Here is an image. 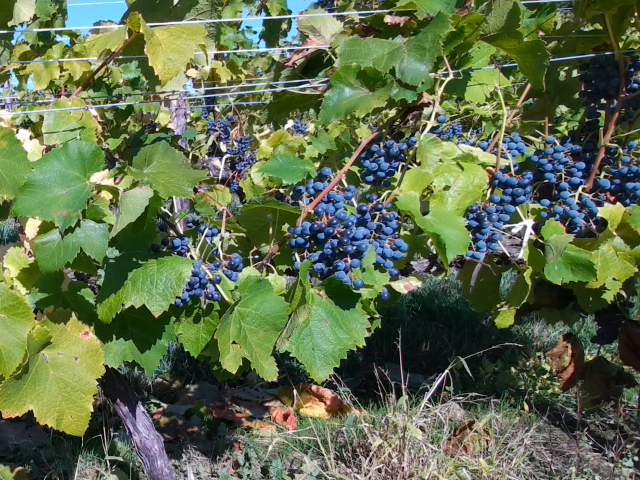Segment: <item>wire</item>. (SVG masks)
<instances>
[{"instance_id":"d2f4af69","label":"wire","mask_w":640,"mask_h":480,"mask_svg":"<svg viewBox=\"0 0 640 480\" xmlns=\"http://www.w3.org/2000/svg\"><path fill=\"white\" fill-rule=\"evenodd\" d=\"M329 86H330L329 82L304 83V84L283 85L279 87H270L267 89H260V90H244V91H230V92H223V93L198 94V95L188 96L185 98H171V97L141 98V99H131V100H120L116 103H101V104H92V105H67V106H59V107H52V108H35L28 111H7V112H0V117L30 116L38 113H54V112H62V111H69V110H94V109H103V108H118L122 105H133V104H143V103H187L190 101H195L200 99L225 98V97L246 96V95H262V94H269L272 92H281L285 90L324 88Z\"/></svg>"},{"instance_id":"a73af890","label":"wire","mask_w":640,"mask_h":480,"mask_svg":"<svg viewBox=\"0 0 640 480\" xmlns=\"http://www.w3.org/2000/svg\"><path fill=\"white\" fill-rule=\"evenodd\" d=\"M389 8L369 9V10H351L339 12H323V13H294V14H275V15H248L245 17H218L208 19H181V20H165V21H146V26H167V25H184V24H210L220 22H248L250 20H277V19H322L326 17H341L354 15H372L389 13Z\"/></svg>"},{"instance_id":"4f2155b8","label":"wire","mask_w":640,"mask_h":480,"mask_svg":"<svg viewBox=\"0 0 640 480\" xmlns=\"http://www.w3.org/2000/svg\"><path fill=\"white\" fill-rule=\"evenodd\" d=\"M330 48H331L330 44H295V45L285 46V47H263V48L235 47V48L195 51L194 55L204 56V55H216V54H227V53H238V52H246V53L287 52V51H293L297 49H330Z\"/></svg>"},{"instance_id":"f0478fcc","label":"wire","mask_w":640,"mask_h":480,"mask_svg":"<svg viewBox=\"0 0 640 480\" xmlns=\"http://www.w3.org/2000/svg\"><path fill=\"white\" fill-rule=\"evenodd\" d=\"M126 26H127L126 22H121V23H112V24L78 25V26H67V27L41 26V27H32V28H3V29H0V34L34 33V32H43V31L70 32V31H80V30H103V29L123 28Z\"/></svg>"},{"instance_id":"a009ed1b","label":"wire","mask_w":640,"mask_h":480,"mask_svg":"<svg viewBox=\"0 0 640 480\" xmlns=\"http://www.w3.org/2000/svg\"><path fill=\"white\" fill-rule=\"evenodd\" d=\"M107 55H79V56H59L50 58H34V59H12V64H36V63H53L61 61H82V60H106Z\"/></svg>"},{"instance_id":"34cfc8c6","label":"wire","mask_w":640,"mask_h":480,"mask_svg":"<svg viewBox=\"0 0 640 480\" xmlns=\"http://www.w3.org/2000/svg\"><path fill=\"white\" fill-rule=\"evenodd\" d=\"M520 62L519 61H505V62H499V63H493V64H485V65H476V66H468L466 68L463 69H445V70H439V71H429L428 75L429 76H441V75H447V74H465L468 73L470 71H478V70H487V69H495V68H501V67H507V66H519Z\"/></svg>"},{"instance_id":"f1345edc","label":"wire","mask_w":640,"mask_h":480,"mask_svg":"<svg viewBox=\"0 0 640 480\" xmlns=\"http://www.w3.org/2000/svg\"><path fill=\"white\" fill-rule=\"evenodd\" d=\"M615 53H616L615 49H611V50L604 51V52H597V53L581 52V53L570 54V55H567V56H560V57L551 58L550 59V63L554 64L556 62L569 61V60H572V59L583 58V57L608 56V55H614Z\"/></svg>"}]
</instances>
